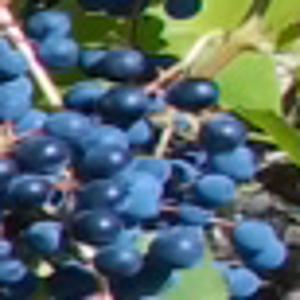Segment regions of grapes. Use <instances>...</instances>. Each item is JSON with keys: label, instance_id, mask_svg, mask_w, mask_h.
<instances>
[{"label": "grapes", "instance_id": "grapes-1", "mask_svg": "<svg viewBox=\"0 0 300 300\" xmlns=\"http://www.w3.org/2000/svg\"><path fill=\"white\" fill-rule=\"evenodd\" d=\"M62 7L25 21L40 64L79 68L52 111L34 99L23 48L0 36V123L17 148L0 157V292L31 297L35 269L53 300H159L180 270L210 255L204 227L254 179L260 161L245 125L216 107L212 78L164 70L171 55L87 44Z\"/></svg>", "mask_w": 300, "mask_h": 300}, {"label": "grapes", "instance_id": "grapes-2", "mask_svg": "<svg viewBox=\"0 0 300 300\" xmlns=\"http://www.w3.org/2000/svg\"><path fill=\"white\" fill-rule=\"evenodd\" d=\"M232 252L242 267L227 277L230 296L247 300L261 288L265 271L283 269L289 259V249L277 230L265 220H246L236 224L230 233Z\"/></svg>", "mask_w": 300, "mask_h": 300}, {"label": "grapes", "instance_id": "grapes-3", "mask_svg": "<svg viewBox=\"0 0 300 300\" xmlns=\"http://www.w3.org/2000/svg\"><path fill=\"white\" fill-rule=\"evenodd\" d=\"M153 0H81L86 12H104L109 17H133L151 7Z\"/></svg>", "mask_w": 300, "mask_h": 300}, {"label": "grapes", "instance_id": "grapes-4", "mask_svg": "<svg viewBox=\"0 0 300 300\" xmlns=\"http://www.w3.org/2000/svg\"><path fill=\"white\" fill-rule=\"evenodd\" d=\"M202 7V0H166L164 12L171 19L191 21L196 18Z\"/></svg>", "mask_w": 300, "mask_h": 300}]
</instances>
